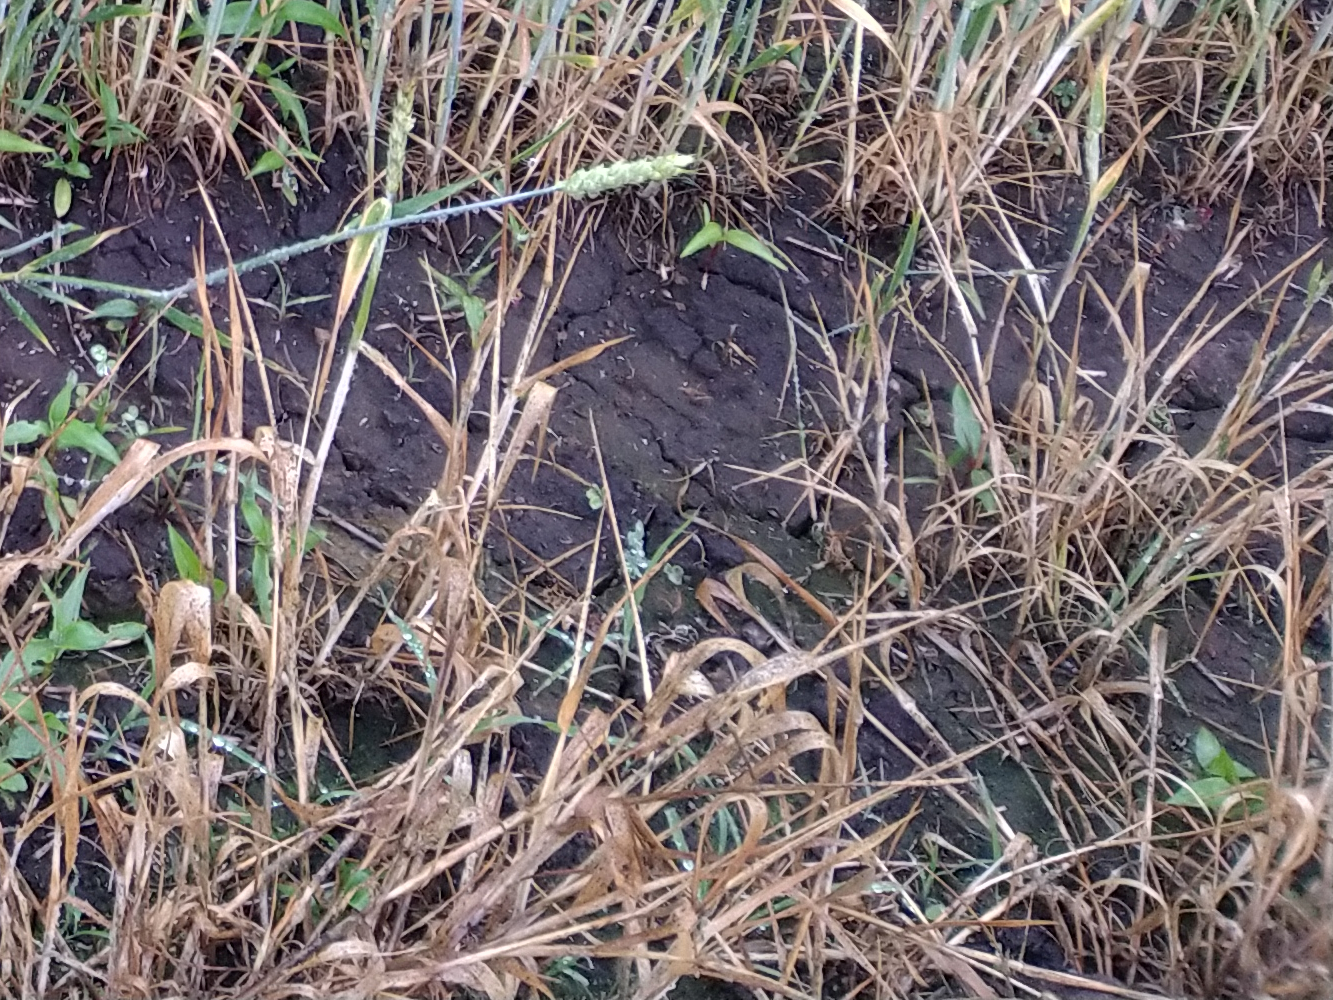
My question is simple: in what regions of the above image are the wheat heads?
[565,155,693,198]
[384,83,412,195]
